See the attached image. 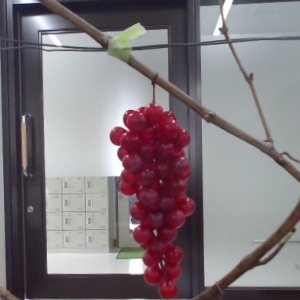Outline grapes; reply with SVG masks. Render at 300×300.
<instances>
[{"label":"grapes","mask_w":300,"mask_h":300,"mask_svg":"<svg viewBox=\"0 0 300 300\" xmlns=\"http://www.w3.org/2000/svg\"><path fill=\"white\" fill-rule=\"evenodd\" d=\"M123 124L113 127L108 139L120 146L117 156L122 180L118 189L124 196L136 193L130 216L140 224L131 239L145 251V283L159 285L163 299L175 300L184 252L172 242L177 228L196 211L194 200L184 194L192 176L191 162L184 158L191 133L181 129L172 110L165 111L152 102L137 110L127 109Z\"/></svg>","instance_id":"01657485"}]
</instances>
